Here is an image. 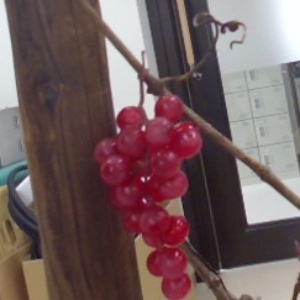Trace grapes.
Instances as JSON below:
<instances>
[{"instance_id":"obj_1","label":"grapes","mask_w":300,"mask_h":300,"mask_svg":"<svg viewBox=\"0 0 300 300\" xmlns=\"http://www.w3.org/2000/svg\"><path fill=\"white\" fill-rule=\"evenodd\" d=\"M184 113V101L177 95L160 97L151 118L142 107L125 108L117 115L121 132L104 137L93 150L102 184L112 187L111 205L125 212L124 230L142 233L143 242L155 249L146 266L153 277H162L167 300H181L192 289L186 254L167 247L187 239L189 224L160 203L187 194L182 160L202 149L200 127L190 120L180 122Z\"/></svg>"}]
</instances>
